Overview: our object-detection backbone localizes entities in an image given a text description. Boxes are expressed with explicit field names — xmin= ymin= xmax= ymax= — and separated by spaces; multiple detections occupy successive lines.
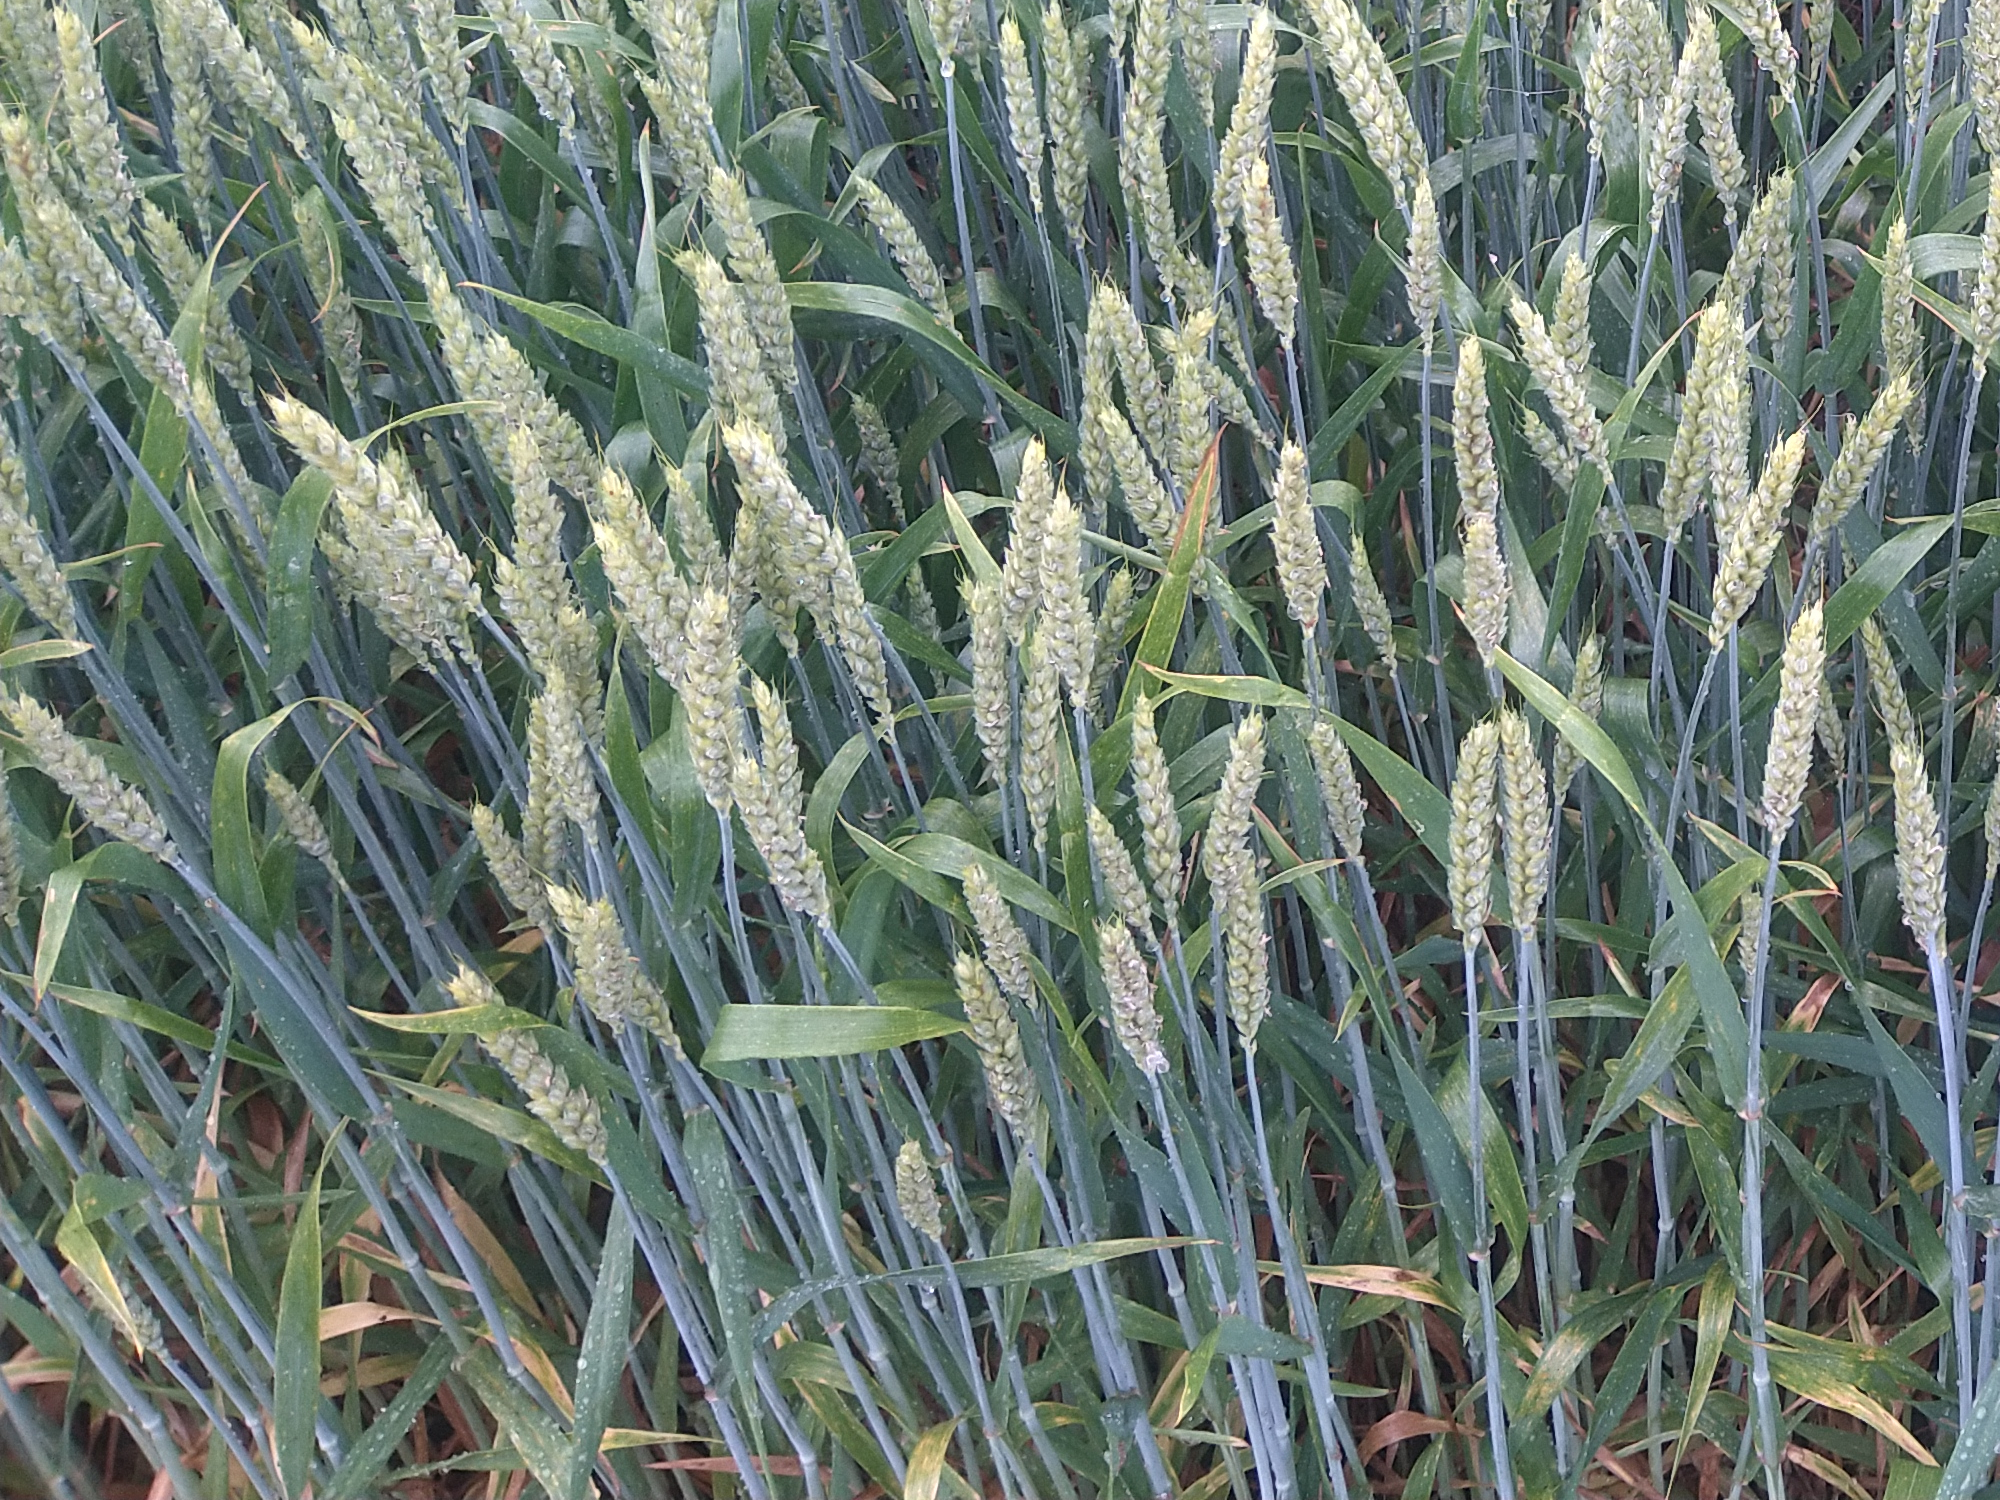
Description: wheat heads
xmin=1449 ymin=723 xmax=1500 ymax=939
xmin=571 ymin=0 xmax=612 ymax=26
xmin=1407 ymin=177 xmax=1443 ymax=322
xmin=1860 ymin=617 xmax=1916 ymax=753
xmin=0 ymin=760 xmax=21 ymax=923
xmin=501 ymin=478 xmax=570 ymax=672
xmin=1 ymin=122 xmax=53 ymax=267
xmin=1881 ymin=222 xmax=1914 ymax=382
xmin=55 ymin=13 xmax=135 ymax=239
xmin=1706 ymin=0 xmax=1797 ymax=86
xmin=160 ymin=5 xmax=215 ymax=203
xmin=1120 ymin=91 xmax=1144 ymax=219
xmin=1454 ymin=338 xmax=1498 ymax=522
xmin=1648 ymin=42 xmax=1701 ymax=221
xmin=721 ymin=429 xmax=834 ymax=628
xmin=1608 ymin=0 xmax=1661 ymax=97
xmin=1131 ymin=695 xmax=1181 ymax=923
xmin=999 ymin=21 xmax=1043 ymax=198
xmin=1717 ymin=250 xmax=1797 ymax=338
xmin=406 ymin=0 xmax=471 ymax=126
xmin=1296 ymin=0 xmax=1429 ymax=191
xmin=1097 ymin=922 xmax=1162 ymax=1069
xmin=1660 ymin=477 xmax=1718 ymax=538
xmin=1762 ymin=177 xmax=1796 ymax=340
xmin=1448 ymin=0 xmax=1472 ymax=31
xmin=1500 ymin=714 xmax=1551 ymax=929
xmin=851 ymin=396 xmax=906 ymax=524
xmin=523 ymin=699 xmax=565 ymax=872
xmin=0 ymin=420 xmax=83 ymax=640
xmin=637 ymin=79 xmax=716 ymax=192
xmin=320 ymin=481 xmax=482 ymax=658
xmin=729 ymin=763 xmax=830 ymax=916
xmin=140 ymin=207 xmax=255 ymax=395
xmin=1436 ymin=1055 xmax=1475 ymax=1158
xmin=593 ymin=477 xmax=695 ymax=683
xmin=723 ymin=429 xmax=890 ymax=712
xmin=1748 ymin=179 xmax=1779 ymax=267
xmin=1214 ymin=11 xmax=1277 ymax=229
xmin=544 ymin=671 xmax=600 ymax=838
xmin=1523 ymin=1330 xmax=1589 ymax=1417
xmin=905 ymin=563 xmax=943 ymax=686
xmin=1002 ymin=441 xmax=1056 ymax=639
xmin=1692 ymin=16 xmax=1745 ymax=212
xmin=1839 ymin=528 xmax=1859 ymax=583
xmin=1131 ymin=0 xmax=1174 ymax=132
xmin=962 ymin=868 xmax=1037 ymax=1010
xmin=1309 ymin=723 xmax=1364 ymax=857
xmin=953 ymin=955 xmax=1039 ymax=1144
xmin=1174 ymin=0 xmax=1214 ymax=119
xmin=291 ymin=28 xmax=463 ymax=199
xmin=683 ymin=257 xmax=789 ymax=456
xmin=292 ymin=201 xmax=333 ymax=305
xmin=875 ymin=617 xmax=892 ymax=737
xmin=1178 ymin=360 xmax=1212 ymax=485
xmin=1553 ymin=639 xmax=1603 ymax=797
xmin=470 ymin=805 xmax=553 ymax=932
xmin=160 ymin=0 xmax=306 ymax=145
xmin=774 ymin=0 xmax=831 ymax=31
xmin=707 ymin=174 xmax=801 ymax=394
xmin=1461 ymin=480 xmax=1509 ymax=656
xmin=1761 ymin=605 xmax=1827 ymax=832
xmin=508 ymin=431 xmax=569 ymax=610
xmin=1660 ymin=310 xmax=1733 ymax=528
xmin=972 ymin=585 xmax=1011 ymax=781
xmin=451 ymin=965 xmax=511 ymax=1037
xmin=1509 ymin=303 xmax=1612 ymax=478
xmin=1147 ymin=248 xmax=1250 ymax=375
xmin=426 ymin=277 xmax=605 ymax=504
xmin=213 ymin=478 xmax=273 ymax=592
xmin=1020 ymin=630 xmax=1060 ymax=846
xmin=299 ymin=250 xmax=364 ymax=397
xmin=1086 ymin=807 xmax=1158 ymax=950
xmin=1968 ymin=0 xmax=2000 ymax=153
xmin=1816 ymin=678 xmax=1846 ymax=770
xmin=635 ymin=0 xmax=710 ymax=104
xmin=665 ymin=468 xmax=728 ymax=593
xmin=456 ymin=976 xmax=611 ymax=1160
xmin=1971 ymin=169 xmax=2000 ymax=367
xmin=2 ymin=697 xmax=181 ymax=863
xmin=440 ymin=0 xmax=576 ymax=122
xmin=1100 ymin=288 xmax=1167 ymax=463
xmin=33 ymin=208 xmax=198 ymax=395
xmin=1041 ymin=7 xmax=1088 ymax=228
xmin=0 ymin=0 xmax=65 ymax=108
xmin=1204 ymin=714 xmax=1267 ymax=878
xmin=545 ymin=890 xmax=680 ymax=1050
xmin=683 ymin=592 xmax=742 ymax=807
xmin=855 ymin=181 xmax=953 ymax=331
xmin=191 ymin=382 xmax=275 ymax=580
xmin=1716 ymin=198 xmax=1775 ymax=308
xmin=264 ymin=770 xmax=338 ymax=874
xmin=1711 ymin=436 xmax=1808 ymax=646
xmin=358 ymin=0 xmax=417 ymax=96
xmin=558 ymin=609 xmax=604 ymax=748
xmin=1272 ymin=444 xmax=1327 ymax=622
xmin=1739 ymin=891 xmax=1762 ymax=987
xmin=1984 ymin=643 xmax=2000 ymax=866
xmin=1079 ymin=305 xmax=1112 ymax=497
xmin=1 ymin=249 xmax=88 ymax=353
xmin=1040 ymin=496 xmax=1086 ymax=688
xmin=1349 ymin=536 xmax=1394 ymax=664
xmin=1226 ymin=854 xmax=1269 ymax=1033
xmin=1094 ymin=478 xmax=1231 ymax=608
xmin=1810 ymin=377 xmax=1914 ymax=539
xmin=1088 ymin=572 xmax=1135 ymax=711
xmin=1891 ymin=747 xmax=1946 ymax=950
xmin=767 ymin=43 xmax=810 ymax=114
xmin=897 ymin=1142 xmax=942 ymax=1237
xmin=582 ymin=60 xmax=620 ymax=167
xmin=1241 ymin=162 xmax=1298 ymax=330
xmin=1552 ymin=253 xmax=1593 ymax=378
xmin=1140 ymin=135 xmax=1178 ymax=283
xmin=1160 ymin=326 xmax=1269 ymax=441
